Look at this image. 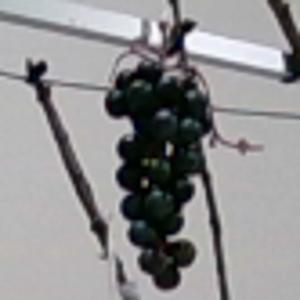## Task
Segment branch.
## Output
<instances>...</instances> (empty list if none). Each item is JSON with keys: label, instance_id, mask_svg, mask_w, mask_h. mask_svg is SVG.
<instances>
[{"label": "branch", "instance_id": "branch-2", "mask_svg": "<svg viewBox=\"0 0 300 300\" xmlns=\"http://www.w3.org/2000/svg\"><path fill=\"white\" fill-rule=\"evenodd\" d=\"M205 196V205L208 214V228L212 240V256L219 300H233L229 275L225 259V244L223 241L224 230L221 212L219 211L218 198L215 193L214 178L206 165L201 175L198 176Z\"/></svg>", "mask_w": 300, "mask_h": 300}, {"label": "branch", "instance_id": "branch-3", "mask_svg": "<svg viewBox=\"0 0 300 300\" xmlns=\"http://www.w3.org/2000/svg\"><path fill=\"white\" fill-rule=\"evenodd\" d=\"M173 25L169 29V41L166 45V60L178 56L174 68L181 70V76L194 80L189 57L185 47L186 38L200 26V21L188 15L182 18L181 0H168Z\"/></svg>", "mask_w": 300, "mask_h": 300}, {"label": "branch", "instance_id": "branch-4", "mask_svg": "<svg viewBox=\"0 0 300 300\" xmlns=\"http://www.w3.org/2000/svg\"><path fill=\"white\" fill-rule=\"evenodd\" d=\"M273 13L282 35L300 65V29L295 22L289 2L284 0H265Z\"/></svg>", "mask_w": 300, "mask_h": 300}, {"label": "branch", "instance_id": "branch-1", "mask_svg": "<svg viewBox=\"0 0 300 300\" xmlns=\"http://www.w3.org/2000/svg\"><path fill=\"white\" fill-rule=\"evenodd\" d=\"M24 72L27 75L24 77V83L32 89L36 103L46 116V126L51 132V139L57 146L75 196L89 221V233L96 237L101 248L96 259L100 262L110 261L115 272L116 291L121 300H142L136 283L128 278L125 262L111 249L109 223L98 209L95 191L77 158L70 134L53 100L51 86L45 85L42 80L49 73L48 61L37 59L34 62L31 56L25 57Z\"/></svg>", "mask_w": 300, "mask_h": 300}]
</instances>
